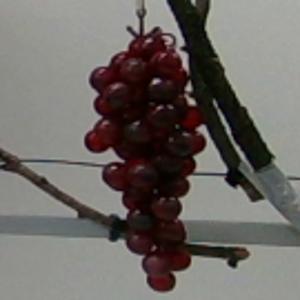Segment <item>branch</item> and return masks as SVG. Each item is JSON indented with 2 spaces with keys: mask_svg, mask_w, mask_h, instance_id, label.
Wrapping results in <instances>:
<instances>
[{
  "mask_svg": "<svg viewBox=\"0 0 300 300\" xmlns=\"http://www.w3.org/2000/svg\"><path fill=\"white\" fill-rule=\"evenodd\" d=\"M0 162H3L0 164V171L20 176L44 194L49 195L53 200L74 210L77 212L75 219L90 220L108 230L107 241L109 243H117L120 238L125 240L130 230L126 224V219H121L118 213L112 212L110 215H106L83 204L75 197L59 189L58 186L51 184L45 176L26 167L15 154L8 152L1 146Z\"/></svg>",
  "mask_w": 300,
  "mask_h": 300,
  "instance_id": "branch-2",
  "label": "branch"
},
{
  "mask_svg": "<svg viewBox=\"0 0 300 300\" xmlns=\"http://www.w3.org/2000/svg\"><path fill=\"white\" fill-rule=\"evenodd\" d=\"M192 257L223 261L231 270H237L239 263L246 261L252 255L245 246H224L212 244H192L187 241Z\"/></svg>",
  "mask_w": 300,
  "mask_h": 300,
  "instance_id": "branch-3",
  "label": "branch"
},
{
  "mask_svg": "<svg viewBox=\"0 0 300 300\" xmlns=\"http://www.w3.org/2000/svg\"><path fill=\"white\" fill-rule=\"evenodd\" d=\"M165 0L183 39L179 51L187 55L190 88L184 95L202 106L206 127L232 190H241L249 203L267 200L300 231V192L282 171L229 81L223 60L208 36L211 0ZM218 109H219L220 112H221V114H222V116L224 117V119H225V123L228 125L229 131H230V135L228 134V131H227V129H226V127H225V124H224L223 119L221 118V116L219 115V113H218ZM230 135H231L232 138H233L234 143L239 147V149H240V151H241V153L243 154L245 160H243V158L241 157V155L239 154V152L236 150L234 144H233V142H232V139L230 138Z\"/></svg>",
  "mask_w": 300,
  "mask_h": 300,
  "instance_id": "branch-1",
  "label": "branch"
}]
</instances>
